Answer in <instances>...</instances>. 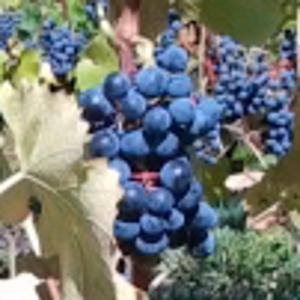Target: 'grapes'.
<instances>
[{"label": "grapes", "instance_id": "grapes-1", "mask_svg": "<svg viewBox=\"0 0 300 300\" xmlns=\"http://www.w3.org/2000/svg\"><path fill=\"white\" fill-rule=\"evenodd\" d=\"M188 53L179 46L155 52V65L134 75L107 72L102 84L83 89L77 107L94 125L86 142L93 158H108L124 187L116 202L114 234L133 242L142 256H156L170 246L169 234L189 237V256L203 261L216 248L218 217L194 181L190 155L180 151V131L196 138L212 130L220 102L200 95L193 103L192 77L185 74Z\"/></svg>", "mask_w": 300, "mask_h": 300}]
</instances>
